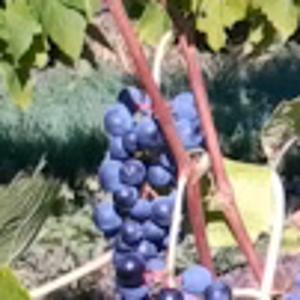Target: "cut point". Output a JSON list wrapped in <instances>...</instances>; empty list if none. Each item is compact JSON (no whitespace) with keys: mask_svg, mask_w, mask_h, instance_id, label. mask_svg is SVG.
Wrapping results in <instances>:
<instances>
[{"mask_svg":"<svg viewBox=\"0 0 300 300\" xmlns=\"http://www.w3.org/2000/svg\"><path fill=\"white\" fill-rule=\"evenodd\" d=\"M174 38L175 25L171 26L157 43L152 64V76L154 78H159L161 76V68L166 47L173 41Z\"/></svg>","mask_w":300,"mask_h":300,"instance_id":"2","label":"cut point"},{"mask_svg":"<svg viewBox=\"0 0 300 300\" xmlns=\"http://www.w3.org/2000/svg\"><path fill=\"white\" fill-rule=\"evenodd\" d=\"M187 178L188 172L186 170H181L178 173V187L174 198L172 212V228L167 247V273L169 275H174L176 273V251L179 235L181 233V215L187 191Z\"/></svg>","mask_w":300,"mask_h":300,"instance_id":"1","label":"cut point"}]
</instances>
